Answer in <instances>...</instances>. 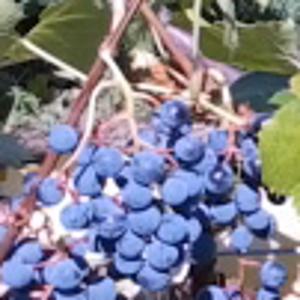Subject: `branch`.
<instances>
[{"label":"branch","instance_id":"30e6481e","mask_svg":"<svg viewBox=\"0 0 300 300\" xmlns=\"http://www.w3.org/2000/svg\"><path fill=\"white\" fill-rule=\"evenodd\" d=\"M145 4V0H131L124 9L116 25L114 26L108 41L100 48L93 64L89 70V75L85 78L74 101L73 111L67 119L70 127H76L84 116V111L88 108L90 101L88 97L98 80L105 72V63L101 60L104 52L112 53L120 44L124 32L129 26L135 14Z\"/></svg>","mask_w":300,"mask_h":300},{"label":"branch","instance_id":"325d2c04","mask_svg":"<svg viewBox=\"0 0 300 300\" xmlns=\"http://www.w3.org/2000/svg\"><path fill=\"white\" fill-rule=\"evenodd\" d=\"M34 205L35 199L32 196H27L22 206L9 216L10 223L7 225L0 241V259H5L8 256L17 232L23 229L24 224L32 213Z\"/></svg>","mask_w":300,"mask_h":300},{"label":"branch","instance_id":"170604dd","mask_svg":"<svg viewBox=\"0 0 300 300\" xmlns=\"http://www.w3.org/2000/svg\"><path fill=\"white\" fill-rule=\"evenodd\" d=\"M58 161L59 155L54 151H49L46 154V159L44 163L38 169V174L41 177H47L50 174V172L54 169Z\"/></svg>","mask_w":300,"mask_h":300}]
</instances>
